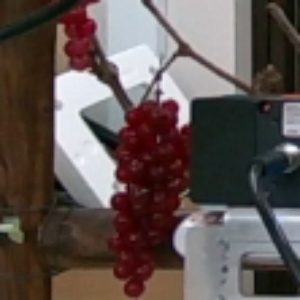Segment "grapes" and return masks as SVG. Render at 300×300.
<instances>
[{
    "label": "grapes",
    "mask_w": 300,
    "mask_h": 300,
    "mask_svg": "<svg viewBox=\"0 0 300 300\" xmlns=\"http://www.w3.org/2000/svg\"><path fill=\"white\" fill-rule=\"evenodd\" d=\"M65 35V54L72 69L84 72L92 65L91 51L96 49L98 23L88 16L87 2L61 16Z\"/></svg>",
    "instance_id": "2"
},
{
    "label": "grapes",
    "mask_w": 300,
    "mask_h": 300,
    "mask_svg": "<svg viewBox=\"0 0 300 300\" xmlns=\"http://www.w3.org/2000/svg\"><path fill=\"white\" fill-rule=\"evenodd\" d=\"M180 110L176 99H166L161 107L156 100H143L127 112L128 125L118 133L115 178L126 190L111 197L119 236L108 242V250L117 258L112 273L126 280L128 296L146 291L143 283L157 261L148 248L166 234L172 212L179 208V193L191 183L193 127L188 123L178 131Z\"/></svg>",
    "instance_id": "1"
}]
</instances>
